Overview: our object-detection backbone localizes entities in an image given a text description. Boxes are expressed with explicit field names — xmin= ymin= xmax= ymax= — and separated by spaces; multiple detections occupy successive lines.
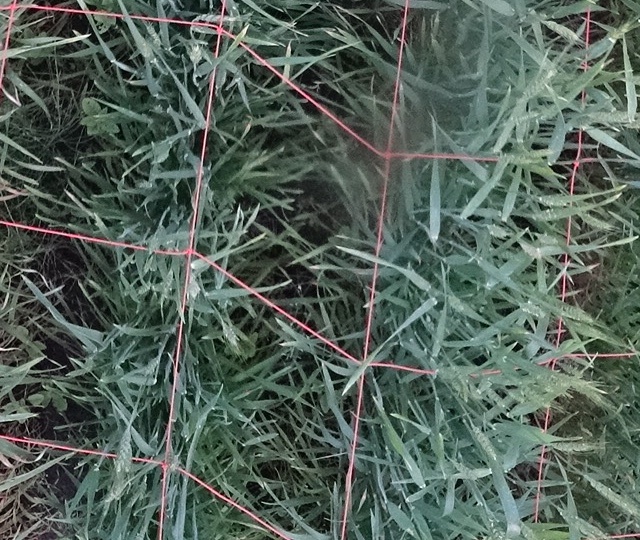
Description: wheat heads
xmin=562 ymin=510 xmax=600 ymax=535
xmin=144 ymin=24 xmax=159 ymax=44
xmin=452 ymin=369 xmax=470 ymax=386
xmin=483 ymin=515 xmax=509 ymax=539
xmin=520 ymin=71 xmax=557 ymax=99
xmin=532 ymin=229 xmax=555 ymax=244
xmin=166 ymin=448 xmax=176 ymax=472
xmin=486 ymin=224 xmax=508 ymax=240
xmin=446 ymin=294 xmax=463 ymax=314
xmin=519 ymin=302 xmax=544 ymax=322
xmin=138 ymin=479 xmax=148 ymax=500
xmin=529 ymin=146 xmax=555 ymax=158
xmin=161 ymin=267 xmax=171 ymax=291
xmin=145 ymin=358 xmax=164 ymax=377
xmin=544 ymin=18 xmax=580 ymax=41
xmin=542 ymin=372 xmax=600 ymax=399
xmin=539 ymin=294 xmax=585 ymax=319
xmin=448 ymin=458 xmax=479 ymax=482
xmin=499 ymin=152 xmax=538 ymax=171
xmin=517 ymin=382 xmax=548 ymax=404
xmin=583 ymin=211 xmax=604 ymax=230
xmin=191 ymin=11 xmax=233 ymax=26
xmin=510 ymin=241 xmax=539 ymax=260
xmin=218 ymin=321 xmax=235 ymax=345
xmin=482 ymin=388 xmax=504 ymax=409
xmin=571 ymin=320 xmax=610 ymax=346
xmin=473 ymin=420 xmax=494 ymax=457
xmin=583 ymin=475 xmax=632 ymax=510
xmin=534 ymin=208 xmax=563 ymax=220
xmin=449 ymin=374 xmax=458 ymax=394
xmin=115 ymin=429 xmax=130 ymax=465
xmin=535 ymin=190 xmax=570 ymax=206
xmin=550 ymin=442 xmax=588 ymax=452
xmin=554 ymin=361 xmax=584 ymax=374
xmin=187 ymin=46 xmax=201 ymax=64
xmin=138 ymin=280 xmax=150 ymax=295
xmin=588 ymin=109 xmax=636 ymax=129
